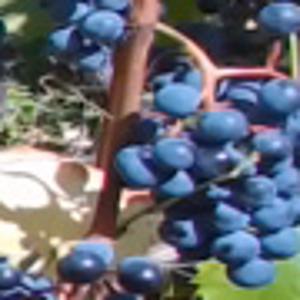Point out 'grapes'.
I'll use <instances>...</instances> for the list:
<instances>
[{
	"label": "grapes",
	"mask_w": 300,
	"mask_h": 300,
	"mask_svg": "<svg viewBox=\"0 0 300 300\" xmlns=\"http://www.w3.org/2000/svg\"><path fill=\"white\" fill-rule=\"evenodd\" d=\"M114 259L115 247L110 240L82 238L58 256L56 272L69 283L91 281L102 275Z\"/></svg>",
	"instance_id": "grapes-3"
},
{
	"label": "grapes",
	"mask_w": 300,
	"mask_h": 300,
	"mask_svg": "<svg viewBox=\"0 0 300 300\" xmlns=\"http://www.w3.org/2000/svg\"><path fill=\"white\" fill-rule=\"evenodd\" d=\"M166 278V269L154 258L129 256L116 266V281L124 288L111 289L105 300H143L152 295Z\"/></svg>",
	"instance_id": "grapes-4"
},
{
	"label": "grapes",
	"mask_w": 300,
	"mask_h": 300,
	"mask_svg": "<svg viewBox=\"0 0 300 300\" xmlns=\"http://www.w3.org/2000/svg\"><path fill=\"white\" fill-rule=\"evenodd\" d=\"M0 300H56L53 282L27 273L9 256H0Z\"/></svg>",
	"instance_id": "grapes-5"
},
{
	"label": "grapes",
	"mask_w": 300,
	"mask_h": 300,
	"mask_svg": "<svg viewBox=\"0 0 300 300\" xmlns=\"http://www.w3.org/2000/svg\"><path fill=\"white\" fill-rule=\"evenodd\" d=\"M150 74L154 103L114 156L121 182L165 203L159 245L266 288L300 253V80L215 77L202 94L203 72L169 47Z\"/></svg>",
	"instance_id": "grapes-1"
},
{
	"label": "grapes",
	"mask_w": 300,
	"mask_h": 300,
	"mask_svg": "<svg viewBox=\"0 0 300 300\" xmlns=\"http://www.w3.org/2000/svg\"><path fill=\"white\" fill-rule=\"evenodd\" d=\"M132 0H46L44 50L62 64L73 65L80 75L108 81L116 51L129 21Z\"/></svg>",
	"instance_id": "grapes-2"
},
{
	"label": "grapes",
	"mask_w": 300,
	"mask_h": 300,
	"mask_svg": "<svg viewBox=\"0 0 300 300\" xmlns=\"http://www.w3.org/2000/svg\"><path fill=\"white\" fill-rule=\"evenodd\" d=\"M256 21L269 38L285 40L300 30V7L291 1L262 0L256 8Z\"/></svg>",
	"instance_id": "grapes-6"
}]
</instances>
